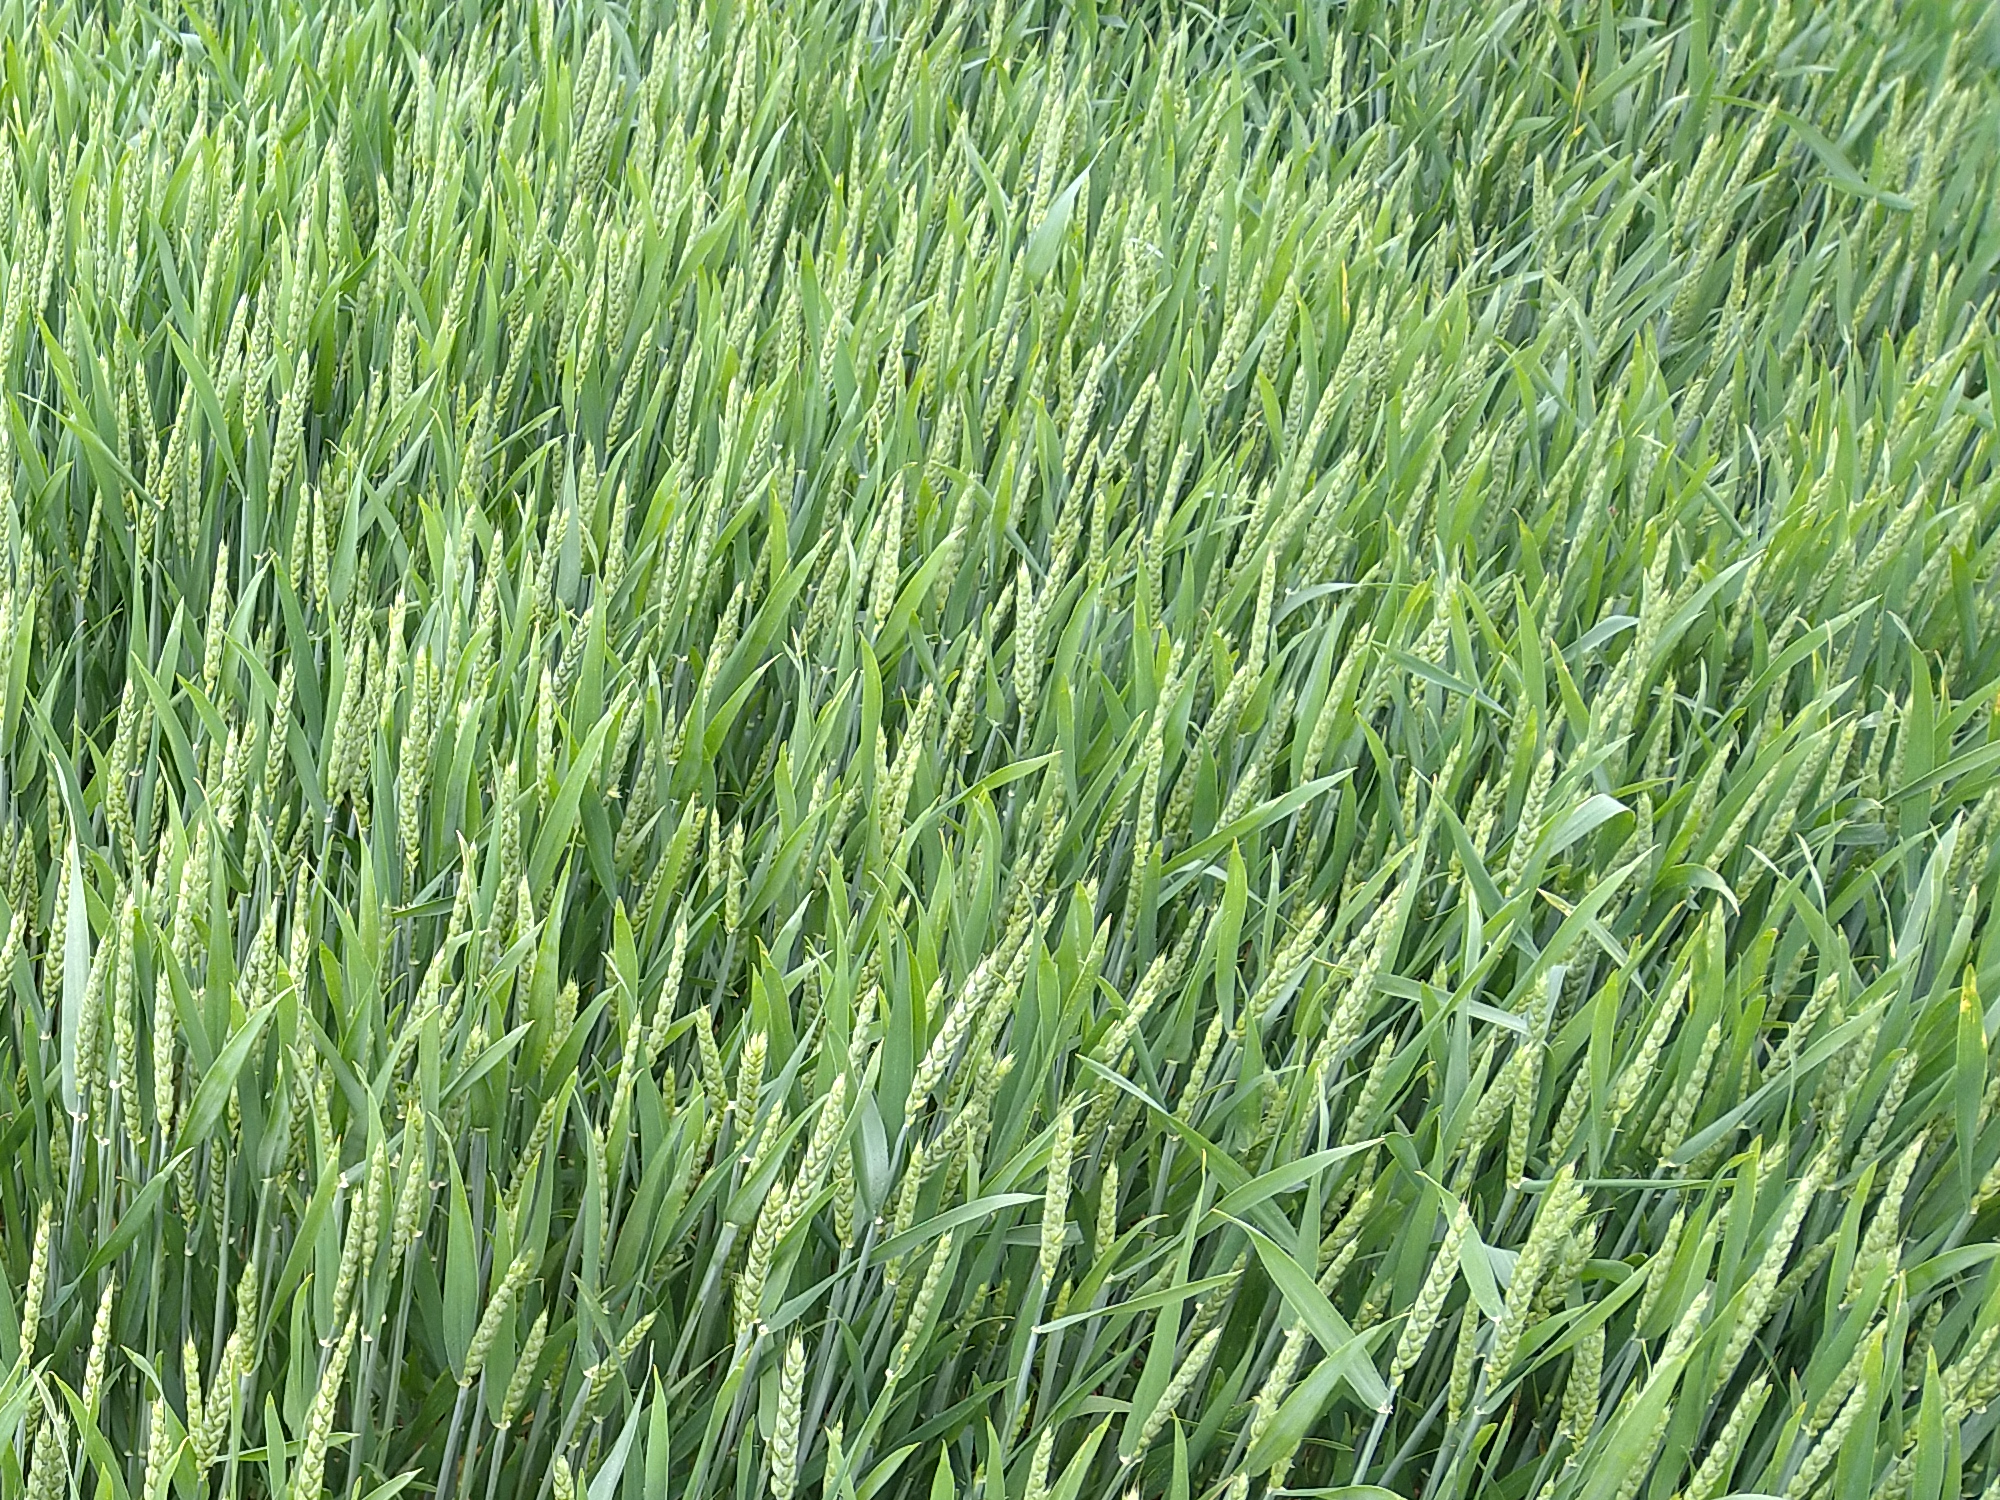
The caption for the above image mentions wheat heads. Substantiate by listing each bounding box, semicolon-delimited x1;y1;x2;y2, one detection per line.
685;196;708;264
149;70;171;133
935;111;968;195
1270;192;1299;238
567;1313;657;1449
1766;945;1811;1022
1156;0;1172;33
391;312;412;445
1820;57;1859;124
638;527;672;611
76;487;104;599
1394;444;1441;545
1566;308;1580;380
1475;576;1519;638
265;659;295;791
364;53;384;106
983;334;1020;444
1782;291;1822;361
348;377;382;444
271;798;291;846
1056;346;1106;473
1841;544;1855;595
283;356;307;460
1035;98;1067;233
1542;586;1564;650
625;93;652;224
317;16;333;79
846;0;873;78
977;1282;1010;1371
1588;365;1635;485
1003;1400;1032;1459
948;898;1056;1101
92;1010;105;1132
1258;1239;1359;1432
1707;238;1750;366
548;215;580;309
0;905;27;1048
1858;693;1898;787
1778;372;1805;455
42;863;66;1010
850;293;884;383
403;143;410;206
680;0;689;105
321;459;331;515
1539;390;1614;502
143;835;170;929
1125;246;1138;361
693;163;700;220
521;879;531;1015
467;879;509;976
349;41;371;102
1600;642;1629;717
1038;552;1068;621
868;897;906;981
316;1083;333;1173
454;380;465;461
160;0;179;40
1146;386;1162;499
744;1099;792;1184
816;252;822;291
792;763;828;880
202;541;228;682
1940;1318;1996;1402
372;170;393;288
1056;88;1086;173
0;485;11;585
725;820;742;933
1436;76;1457;139
1412;356;1445;407
332;1189;364;1318
504;1314;549;1421
1850;416;1874;467
1566;254;1577;300
1680;552;1705;615
835;273;844;317
1868;607;1887;653
605;225;625;350
1291;831;1321;896
74;926;113;1096
1451;778;1488;880
182;152;202;261
929;112;940;175
199;0;224;41
1367;288;1391;340
1428;222;1450;314
266;392;293;499
1898;1300;1946;1379
1823;1004;1889;1156
551;436;561;505
1372;325;1397;372
1248;909;1328;1031
1544;694;1572;751
361;1143;386;1269
423;57;435;186
652;30;664;66
36;549;52;654
617;741;657;849
1539;321;1565;368
131;698;157;781
825;260;832;294
884;1209;920;1289
1494;276;1525;339
1680;741;1730;838
1472;812;1494;869
243;286;270;424
1600;245;1615;288
314;485;329;605
1601;207;1632;248
429;662;443;728
381;954;442;1108
1189;661;1220;720
1868;398;1904;502
1337;560;1385;613
1348;356;1399;440
240;927;259;1022
45;147;65;234
1973;539;2000;578
989;450;1038;564
1698;97;1781;252
823;174;844;249
1331;25;1342;115
1888;250;1921;332
654;124;685;234
1008;810;1070;922
844;985;880;1085
331;458;357;537
1570;681;1632;779
12;532;34;610
174;1148;195;1227
1315;180;1369;250
1654;1289;1708;1396
282;62;304;121
1387;216;1413;293
972;68;996;141
1648;691;1671;788
253;915;276;1072
297;1313;356;1500
1161;442;1186;524
904;50;924;98
865;319;902;446
1090;496;1106;569
737;1034;767;1137
181;1339;201;1450
1301;536;1337;587
1273;897;1314;951
62;301;77;387
672;1102;732;1222
1162;386;1177;450
1200;190;1226;267
1014;1430;1055;1500
0;54;4;110
1101;372;1156;479
530;163;557;270
337;573;351;654
1949;783;2000;886
714;267;734;317
602;482;628;603
217;723;259;828
10;839;27;911
280;802;315;881
202;177;212;243
846;250;866;320
0;264;22;379
1664;223;1721;342
1625;429;1657;534
707;805;721;894
368;634;382;706
745;24;759;119
1724;606;1801;709
729;260;774;343
767;64;797;127
959;833;985;896
1960;289;1996;349
1372;421;1388;474
953;1282;990;1359
784;1080;844;1231
156;403;188;490
1104;954;1166;1055
576;20;610;173
574;224;610;374
1672;375;1709;445
412;95;425;192
834;1136;850;1243
1355;808;1379;869
875;723;890;799
1445;1295;1477;1415
1213;689;1297;831
1713;1177;1823;1388
936;477;977;600
508;1099;558;1196
1576;267;1593;314
1015;558;1039;706
1042;350;1094;427
501;101;511;161
1544;186;1556;267
838;497;887;627
444;597;462;722
720;46;743;127
1051;28;1065;96
262;622;273;672
1701;383;1734;460
198;76;211;131
839;207;860;267
502;759;522;915
334;285;369;389
1966;813;2000;886
499;0;512;64
1507;753;1555;898
1195;308;1240;424
46;1418;70;1500
1822;717;1858;802
1111;1080;1150;1161
117;884;139;1032
1310;170;1328;210
1848;199;1876;269
1135;1327;1222;1453
818;775;863;884
1121;184;1146;257
1089;195;1118;276
811;73;843;153
1636;788;1650;902
967;1052;992;1160
286;1046;315;1186
1639;530;1678;600
1537;279;1558;328
1473;417;1526;538
1376;136;1393;166
1483;130;1524;240
1424;745;1463;845
456;23;483;98
1668;137;1716;231
1140;31;1182;136
1016;359;1048;442
200;244;218;344
1784;1379;1865;1500
1069;1042;1126;1179
794;69;822;156
285;185;315;347
604;326;652;446
747;178;793;293
705;582;744;709
1532;153;1545;244
1842;46;1885;121
390;133;402;202
1538;1222;1602;1309
1238;256;1264;361
1361;1277;1394;1331
1964;1351;2000;1402
1933;414;1967;478
1770;669;1791;716
487;529;503;682
1801;469;1833;527
552;608;597;696
1682;1379;1773;1500
867;159;886;234
725;411;774;523
890;1233;954;1372
111;257;138;394
1173;81;1190;133
1454;164;1473;259
689;491;722;608
1176;129;1230;259
563;28;605;129
1539;1054;1600;1157
142;1395;162;1500
1745;432;1772;493
1093;25;1115;85
1922;1469;2000;1500
1242;550;1278;680
1861;1132;1930;1283
349;548;370;648
742;1189;786;1333
577;448;600;567
376;897;392;993
641;931;685;1063
33;229;60;305
207;734;219;809
531;505;565;610
553;272;586;374
0;164;14;257
351;738;368;840
137;453;164;570
538;985;576;1078
1439;1060;1524;1162
242;788;257;886
1635;594;1672;687
45;746;59;853
695;1011;720;1112
777;282;804;371
1569;470;1607;577
291;852;307;1008
189;1331;230;1456
928;237;954;398
104;84;114;115
1721;411;1742;460
1761;976;1840;1074
852;130;863;207
1837;496;1927;608
0;129;5;219
1352;133;1382;178
1512;693;1530;753
1491;995;1545;1049
225;720;238;785
951;310;965;368
1327;312;1369;424
663;1063;675;1112
465;1261;527;1376
1325;1034;1398;1173
207;1140;223;1249
0;398;18;493
659;325;688;391
337;87;353;174
633;810;705;935
25;206;45;308
1918;347;1960;383
1934;527;1973;597
1544;478;1567;576
870;482;905;619
590;85;619;159
265;106;274;177
1455;1140;1484;1203
1038;1108;1074;1279
545;286;563;351
134;360;155;455
1109;270;1127;308
171;457;186;559
1894;321;1926;377
1245;106;1283;190
919;1067;1014;1174
1701;897;1725;978
1738;1048;1750;1110
1147;529;1162;625
335;645;364;798
745;452;797;600
374;598;406;705
1403;767;1413;839
795;552;838;645
606;1011;641;1132
1057;335;1070;422
808;757;836;819
687;0;706;61
1436;433;1487;519
1596;968;1694;1122
938;582;1016;758
1078;878;1099;926
750;729;779;792
986;0;1007;58
78;1273;116;1431
1777;1465;1837;1500
1176;1010;1223;1131
919;233;947;297
217;193;244;257
737;327;759;396
115;387;135;528
1435;568;1464;623
1075;183;1089;249
1884;78;1904;156
1509;1054;1538;1181
175;861;192;962
1461;349;1489;421
1166;668;1254;837
1644;97;1689;153
1091;1162;1117;1266
64;136;79;199
673;339;700;457
137;774;170;860
1357;1143;1380;1198
1891;694;1916;790
24;826;36;921
107;686;131;829
0;587;17;734
286;484;306;586
456;1025;490;1086
750;207;765;247
1187;1241;1254;1336
408;645;427;743
1928;270;1956;360
20;1201;54;1378
1918;254;1940;335
1281;386;1331;517
1188;84;1235;182
89;92;101;133
1067;284;1096;326
436;979;468;1032
1319;1169;1362;1233
1089;774;1139;849
328;146;346;275
594;1124;613;1260
0;815;16;892
1207;1471;1250;1500
462;381;493;496
679;425;700;486
122;132;154;259
1383;1210;1473;1379
399;735;420;874
929;25;962;91
1167;904;1204;999
1741;735;1832;893
764;454;783;507
1850;239;1902;334
1303;621;1373;781
1811;1349;1863;1429
661;515;685;639
342;687;381;806
550;1452;581;1500
1484;91;1526;156
1684;761;1781;892
822;319;841;392
1009;100;1048;219
1790;542;1847;603
652;26;678;109
214;320;241;404
1224;222;1243;327
887;212;920;330
188;825;210;925
1052;436;1098;549
1338;855;1355;921
1893;508;1975;622
1144;204;1162;243
521;24;536;88
248;57;262;103
1936;582;2000;687
238;1265;253;1371
454;506;480;592
904;908;1026;1121
801;963;821;1058
214;167;232;226
1243;275;1297;432
1712;1146;1781;1242
1589;271;1605;339
1611;1402;1671;1500
1548;921;1606;1037
467;576;493;698
538;663;552;808
1912;136;1934;246
386;61;402;121
909;400;960;556
1328;884;1406;976
1121;757;1161;938
436;1091;470;1175
807;454;849;576
18;1424;48;1500
1903;83;1957;151
1412;610;1451;710
445;234;472;335
184;443;201;551
1291;1048;1338;1155
1936;88;1970;171
1589;317;1621;377
1137;642;1184;756
1474;92;1505;152
33;79;46;121
1399;356;1427;407
446;846;479;943
992;246;1028;371
824;1424;840;1497
111;1028;145;1140
990;849;1027;925
91;177;107;299
890;729;924;853
1641;1203;1688;1332
1478;1173;1584;1397
1730;553;1761;642
539;0;548;87
434;51;459;174
896;1141;924;1241
893;685;934;787
1820;609;1858;688
494;312;533;428
1236;478;1271;566
1662;1023;1719;1150
1303;456;1357;556
151;978;174;1130
1015;796;1033;856
1324;954;1389;1091
1850;1058;1917;1168
889;181;915;265
408;187;435;286
1223;484;1247;559
1560;1323;1602;1446
1195;556;1222;650
723;0;743;91
152;155;175;222
1873;1444;1918;1500
119;145;134;210
1719;32;1752;87
1866;204;1907;250
392;1155;423;1274
766;1339;805;1497
876;17;925;130
600;700;645;782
